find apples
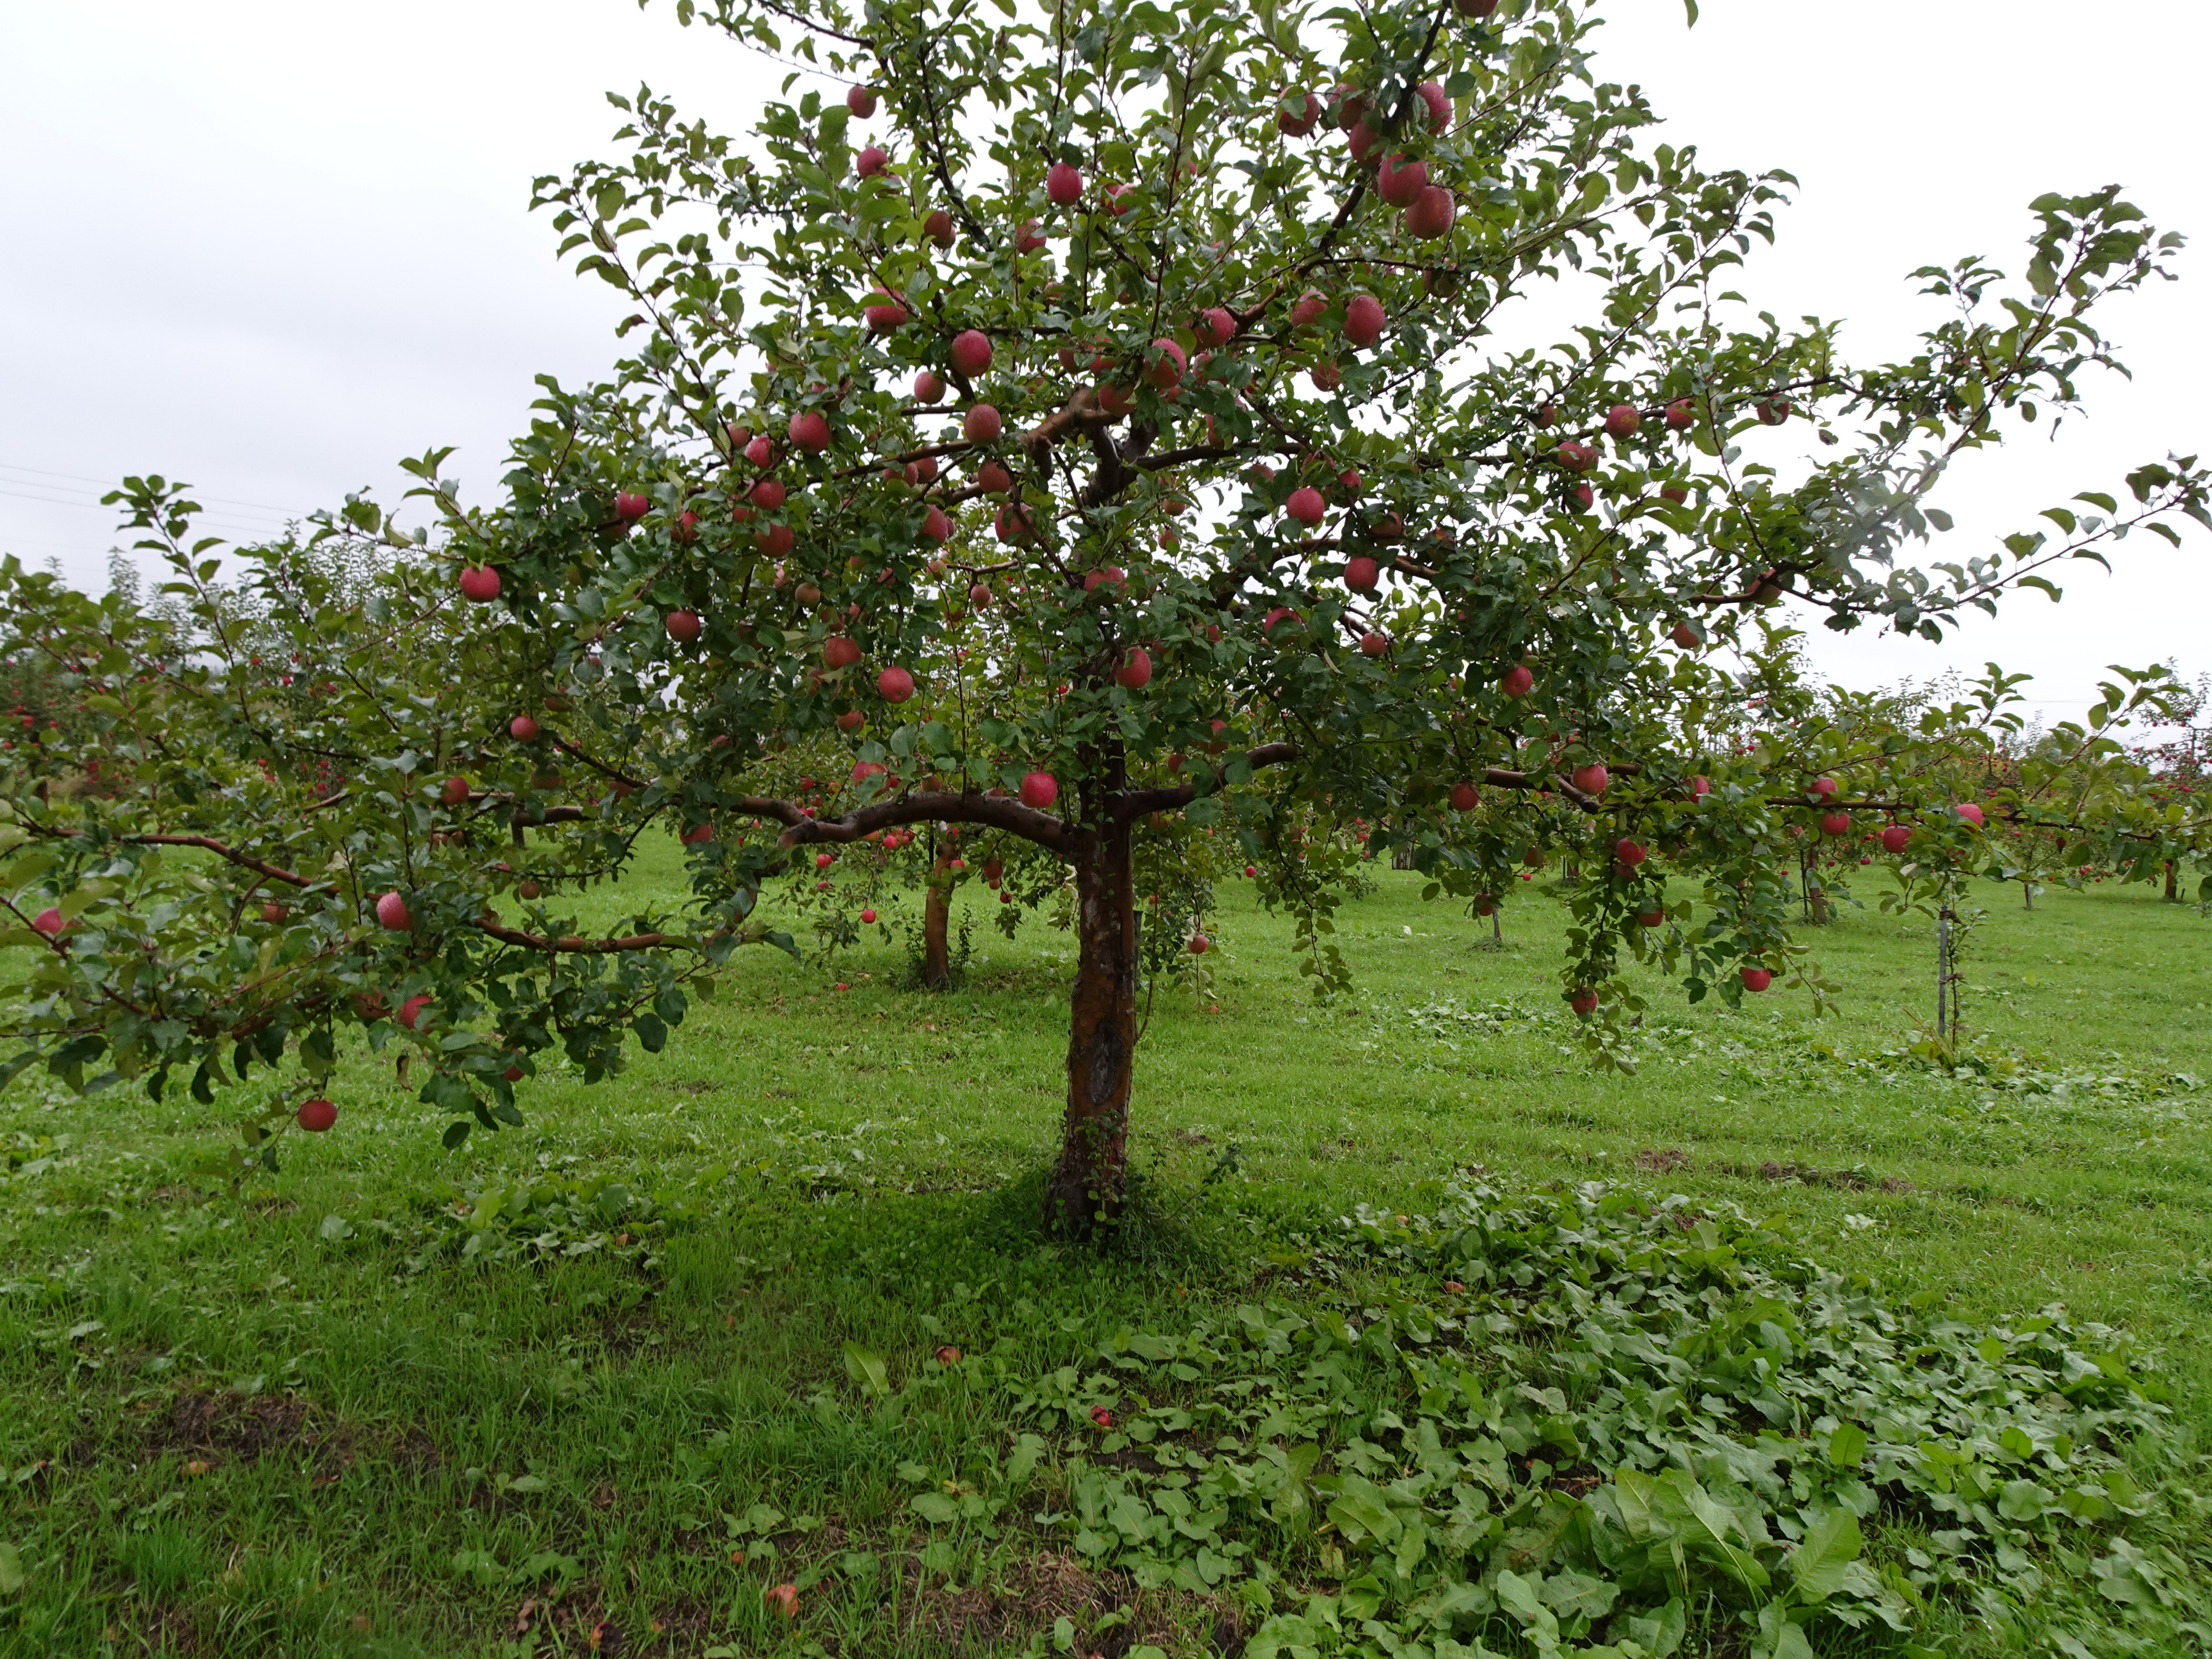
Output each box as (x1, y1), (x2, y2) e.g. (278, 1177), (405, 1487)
(1329, 75), (1376, 130)
(786, 406), (837, 457)
(969, 583), (995, 610)
(1472, 893), (1499, 918)
(1097, 374), (1147, 419)
(861, 906), (877, 924)
(1757, 391), (1789, 427)
(1614, 835), (1652, 869)
(1140, 338), (1190, 391)
(1115, 181), (1153, 223)
(1041, 674), (1072, 698)
(1562, 482), (1595, 513)
(1209, 240), (1235, 266)
(940, 593), (969, 625)
(819, 632), (866, 676)
(528, 756), (565, 793)
(1308, 352), (1346, 393)
(746, 817), (765, 832)
(989, 879), (1000, 890)
(822, 567), (850, 591)
(944, 327), (995, 379)
(1403, 182), (1456, 242)
(253, 895), (291, 931)
(905, 831), (914, 840)
(706, 650), (735, 676)
(1498, 661), (1534, 699)
(863, 828), (877, 843)
(798, 809), (808, 820)
(878, 664), (916, 707)
(1459, 572), (1501, 610)
(354, 984), (393, 1022)
(1164, 749), (1196, 777)
(1366, 506), (1405, 546)
(1535, 788), (1551, 804)
(1274, 340), (1317, 373)
(1450, 0), (1505, 21)
(1013, 374), (1056, 414)
(1000, 891), (1014, 905)
(712, 731), (738, 759)
(881, 458), (920, 493)
(1569, 989), (1599, 1017)
(1107, 260), (1148, 304)
(1349, 110), (1399, 169)
(1741, 564), (1782, 605)
(1038, 593), (1063, 622)
(294, 1094), (339, 1135)
(827, 780), (843, 796)
(1736, 958), (1771, 993)
(1605, 404), (1639, 443)
(457, 561), (502, 604)
(981, 854), (1005, 882)
(662, 605), (703, 646)
(993, 498), (1041, 554)
(871, 560), (902, 593)
(1269, 79), (1321, 142)
(720, 416), (750, 456)
(1674, 774), (1711, 805)
(509, 712), (540, 747)
(1446, 780), (1482, 814)
(1096, 180), (1131, 213)
(1635, 893), (1666, 930)
(1019, 769), (1060, 809)
(373, 887), (422, 939)
(676, 815), (716, 850)
(899, 836), (908, 847)
(1082, 564), (1131, 608)
(903, 449), (942, 486)
(811, 359), (856, 400)
(541, 682), (577, 718)
(1003, 565), (1022, 586)
(1038, 276), (1077, 311)
(30, 903), (83, 958)
(792, 579), (824, 610)
(812, 848), (833, 872)
(940, 512), (961, 539)
(1521, 839), (1548, 869)
(1262, 603), (1305, 649)
(884, 835), (898, 849)
(1019, 582), (1038, 599)
(760, 734), (789, 756)
(1109, 640), (1153, 692)
(1151, 811), (1174, 832)
(1550, 439), (1587, 473)
(961, 402), (1005, 449)
(1881, 826), (1914, 855)
(1045, 160), (1086, 208)
(1244, 458), (1277, 495)
(1819, 809), (1851, 837)
(1343, 555), (1381, 596)
(947, 646), (973, 667)
(1574, 442), (1602, 473)
(1872, 757), (1884, 770)
(773, 564), (804, 590)
(475, 905), (500, 929)
(1081, 330), (1119, 375)
(1054, 330), (1094, 378)
(568, 561), (596, 588)
(920, 206), (960, 246)
(920, 710), (935, 725)
(489, 862), (510, 884)
(835, 706), (866, 739)
(922, 772), (947, 795)
(848, 551), (879, 579)
(516, 877), (542, 903)
(744, 429), (783, 472)
(1566, 728), (1584, 743)
(1359, 629), (1386, 659)
(1415, 530), (1456, 567)
(925, 557), (952, 586)
(1283, 483), (1325, 527)
(1340, 292), (1388, 336)
(853, 142), (897, 192)
(864, 285), (916, 335)
(1158, 523), (1188, 555)
(395, 991), (445, 1036)
(755, 518), (796, 562)
(1570, 758), (1609, 798)
(1399, 78), (1455, 138)
(1379, 152), (1428, 210)
(951, 826), (960, 838)
(1187, 932), (1207, 956)
(1449, 710), (1469, 729)
(1193, 717), (1230, 753)
(938, 678), (955, 699)
(136, 939), (165, 964)
(796, 773), (817, 792)
(906, 501), (948, 550)
(947, 856), (966, 876)
(984, 782), (1007, 804)
(665, 502), (708, 551)
(1660, 475), (1690, 508)
(818, 882), (829, 892)
(1187, 619), (1223, 653)
(1191, 348), (1232, 394)
(721, 490), (760, 526)
(1148, 894), (1160, 905)
(430, 828), (446, 848)
(879, 757), (902, 786)
(1447, 680), (1466, 697)
(1522, 872), (1532, 882)
(613, 483), (652, 521)
(490, 1045), (531, 1088)
(974, 455), (1014, 500)
(1526, 399), (1560, 432)
(1370, 265), (1401, 293)
(1746, 945), (1774, 965)
(1332, 466), (1364, 509)
(1012, 216), (1050, 263)
(763, 344), (805, 380)
(913, 749), (931, 766)
(1455, 608), (1474, 627)
(841, 494), (873, 530)
(1407, 778), (1439, 804)
(575, 650), (608, 684)
(1161, 486), (1191, 519)
(1151, 628), (1187, 663)
(1783, 821), (1805, 841)
(1299, 449), (1339, 490)
(1163, 152), (1197, 189)
(778, 824), (811, 853)
(736, 832), (753, 849)
(1246, 866), (1256, 878)
(1661, 395), (1698, 431)
(449, 825), (467, 849)
(846, 80), (880, 122)
(1288, 287), (1334, 339)
(1187, 302), (1241, 351)
(912, 368), (948, 405)
(892, 828), (902, 835)
(606, 768), (636, 799)
(1345, 246), (1374, 279)
(805, 664), (845, 702)
(811, 801), (822, 813)
(593, 511), (631, 543)
(851, 759), (889, 797)
(1420, 254), (1466, 299)
(1512, 648), (1537, 669)
(1802, 776), (1840, 809)
(748, 474), (787, 513)
(820, 596), (863, 633)
(1671, 617), (1705, 654)
(435, 773), (472, 807)
(1952, 804), (1983, 828)
(727, 623), (779, 669)
(1541, 725), (1560, 745)
(1204, 395), (1252, 441)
